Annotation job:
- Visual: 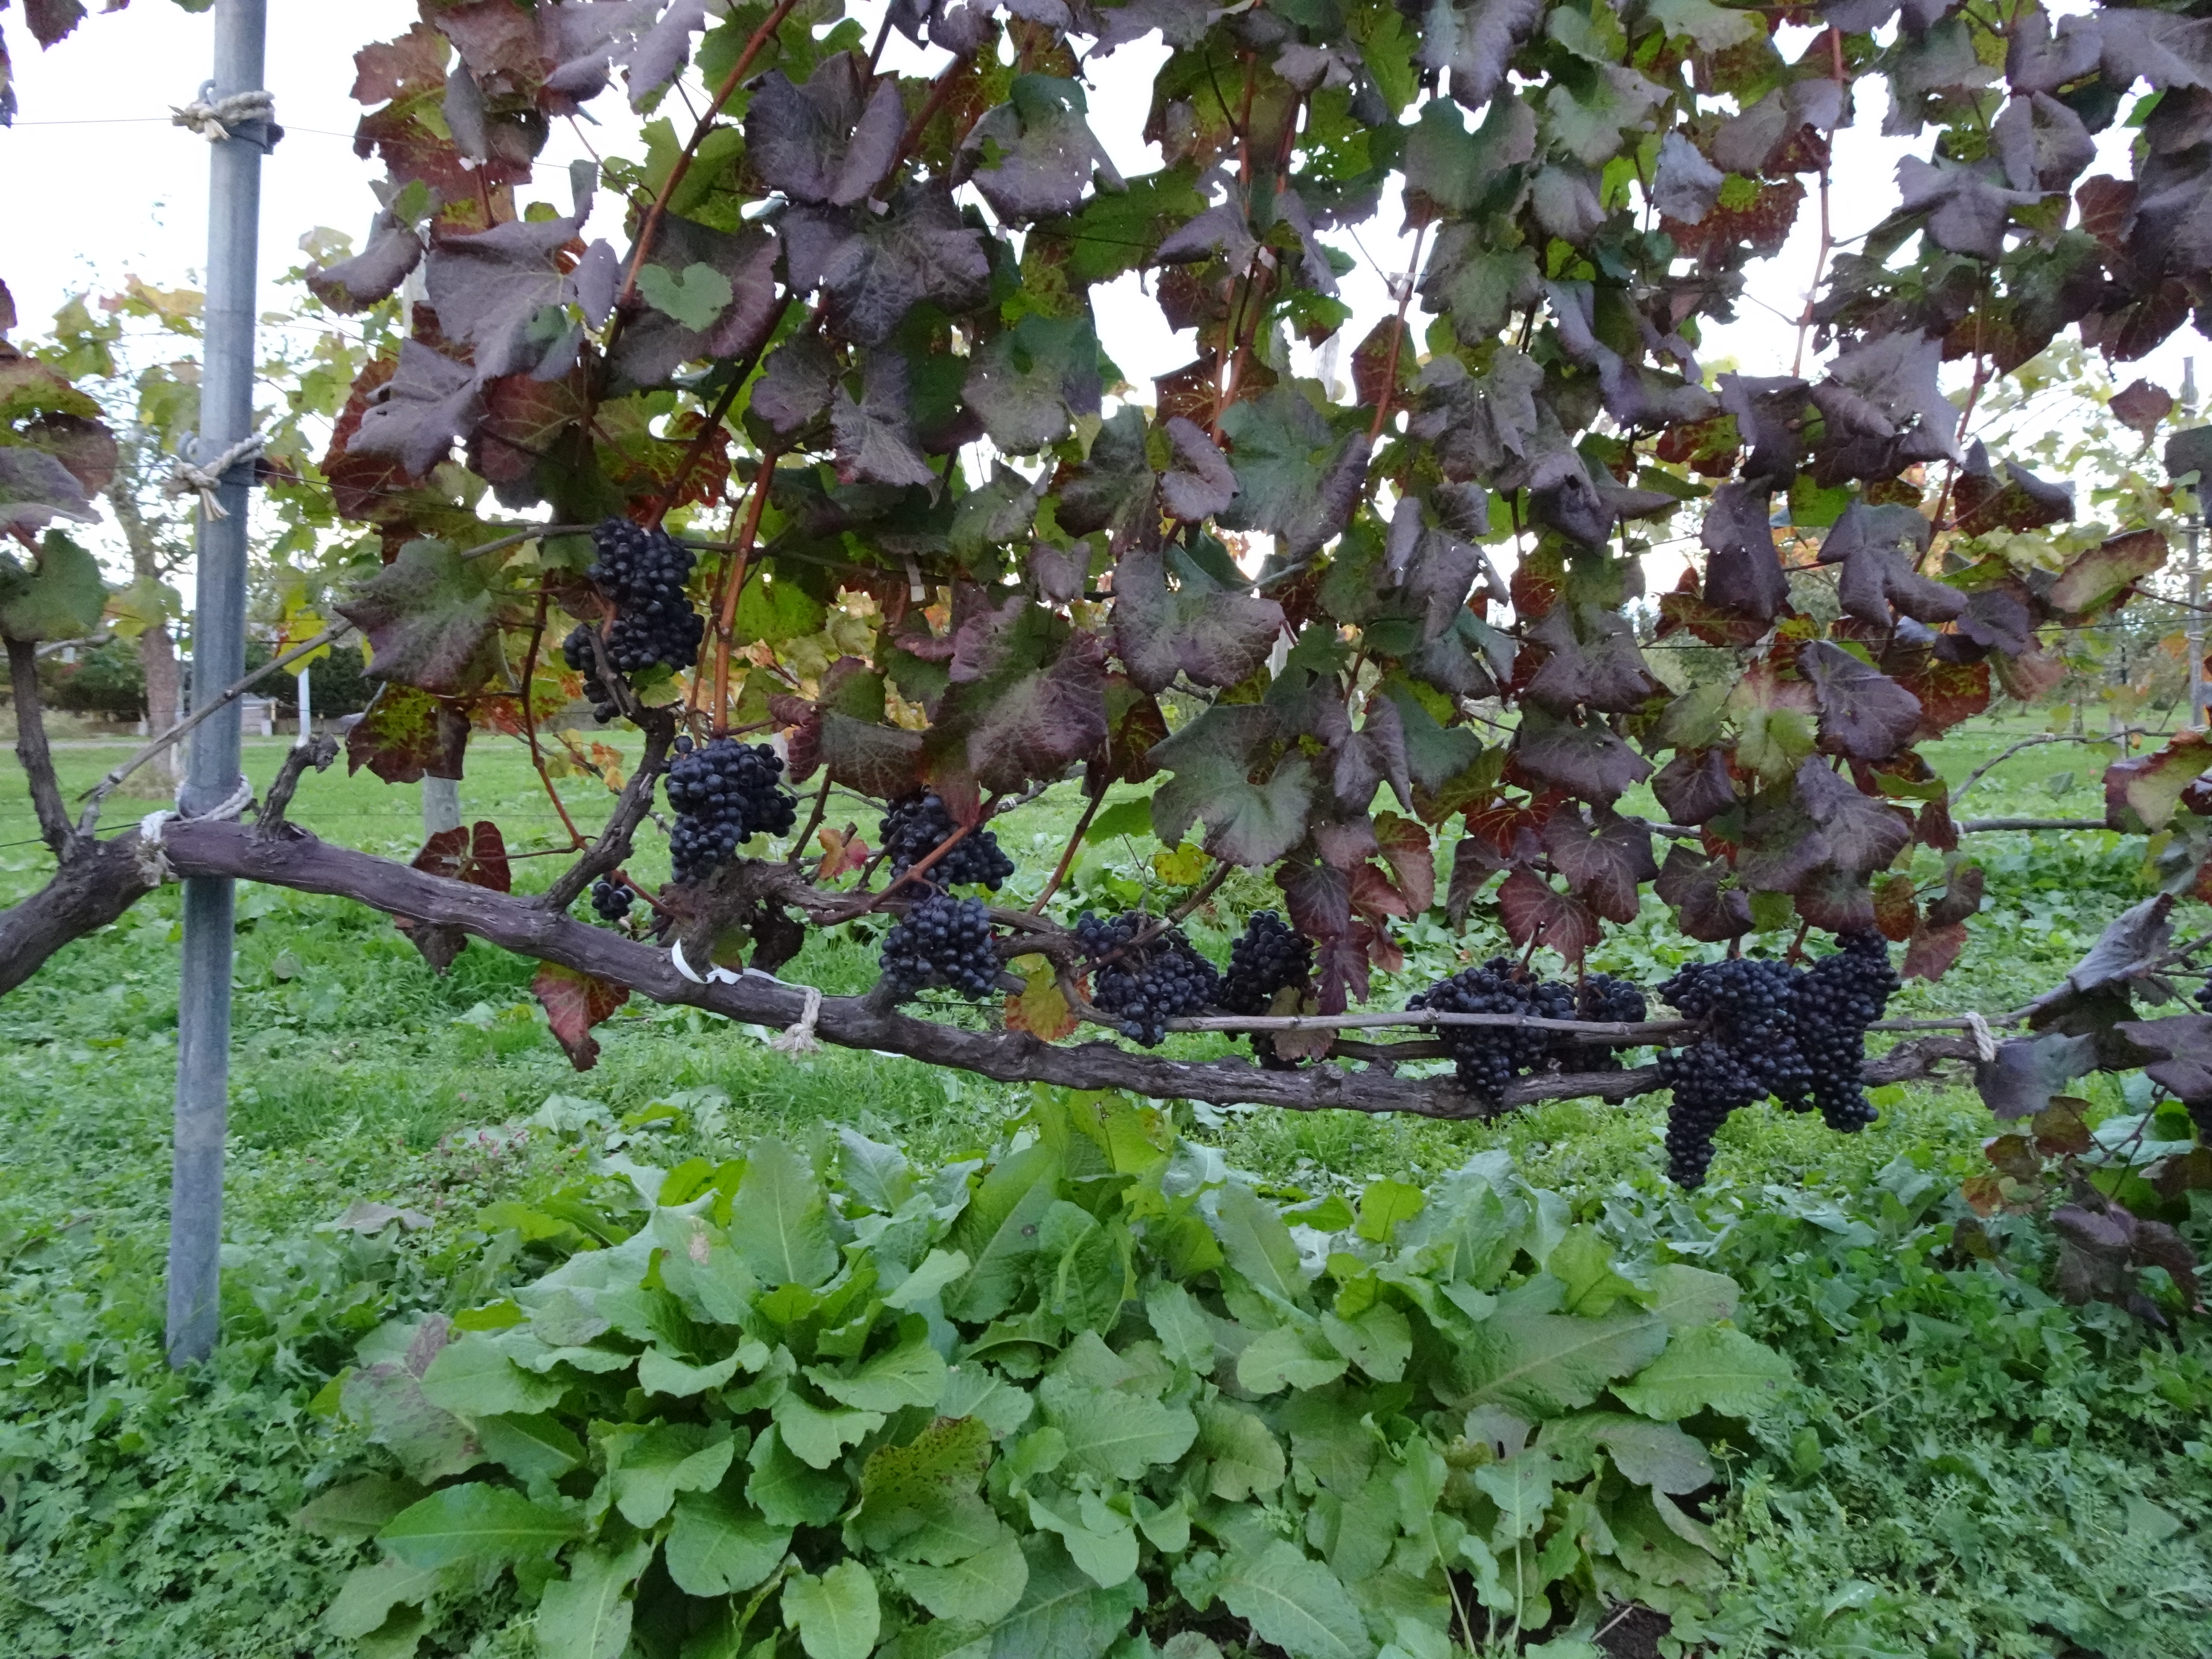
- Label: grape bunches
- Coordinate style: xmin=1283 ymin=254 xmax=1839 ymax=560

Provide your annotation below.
xmin=1075 ymin=908 xmax=1190 ymax=966
xmin=1122 ymin=952 xmax=1223 ymax=1048
xmin=1657 ymin=1042 xmax=1770 ymax=1193
xmin=1212 ymin=909 xmax=1318 ymax=1040
xmin=1508 ymin=980 xmax=1580 ymax=1061
xmin=1552 ymin=1045 xmax=1630 ymax=1109
xmin=1247 ymin=1030 xmax=1312 ymax=1073
xmin=936 ymin=824 xmax=1017 ymax=891
xmin=1831 ymin=914 xmax=1896 ymax=972
xmin=916 ymin=895 xmax=1004 ymax=1002
xmin=1090 ymin=960 xmax=1131 ymax=1016
xmin=745 ymin=893 xmax=792 ymax=936
xmin=732 ymin=742 xmax=802 ymax=844
xmin=1735 ymin=1008 xmax=1814 ymax=1115
xmin=878 ymin=789 xmax=949 ymax=896
xmin=640 ymin=584 xmax=710 ymax=677
xmin=664 ymin=733 xmax=760 ymax=894
xmin=2190 ymin=968 xmax=2212 ymax=1023
xmin=1400 ymin=968 xmax=1530 ymax=1032
xmin=875 ymin=901 xmax=936 ymax=1004
xmin=2176 ymin=1083 xmax=2212 ymax=1152
xmin=587 ymin=516 xmax=697 ymax=616
xmin=1584 ymin=974 xmax=1648 ymax=1055
xmin=1657 ymin=958 xmax=1804 ymax=1046
xmin=1786 ymin=956 xmax=1905 ymax=1020
xmin=1803 ymin=986 xmax=1880 ymax=1138
xmin=591 ymin=865 xmax=635 ymax=927
xmin=1450 ymin=1033 xmax=1526 ymax=1119
xmin=562 ymin=619 xmax=639 ymax=724
xmin=1481 ymin=954 xmax=1538 ymax=1014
